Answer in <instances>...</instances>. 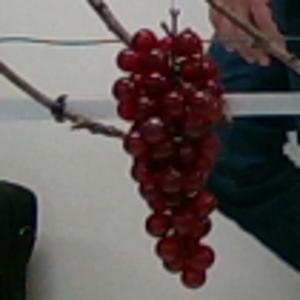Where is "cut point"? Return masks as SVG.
<instances>
[{
    "mask_svg": "<svg viewBox=\"0 0 300 300\" xmlns=\"http://www.w3.org/2000/svg\"><path fill=\"white\" fill-rule=\"evenodd\" d=\"M182 15V9L178 6V0H170L167 16L170 17V34L178 35V18Z\"/></svg>",
    "mask_w": 300,
    "mask_h": 300,
    "instance_id": "cut-point-1",
    "label": "cut point"
}]
</instances>
